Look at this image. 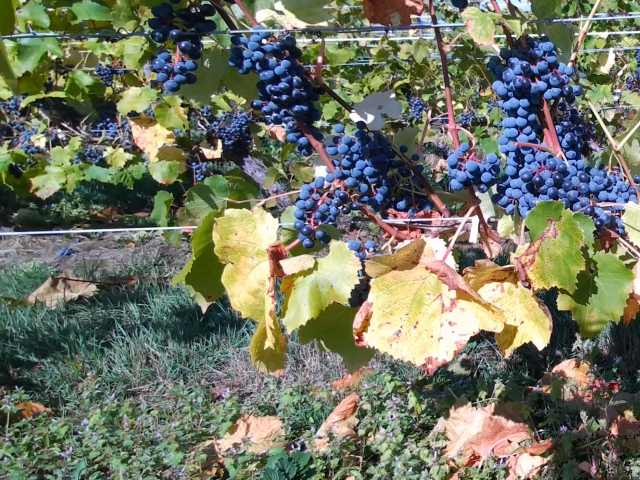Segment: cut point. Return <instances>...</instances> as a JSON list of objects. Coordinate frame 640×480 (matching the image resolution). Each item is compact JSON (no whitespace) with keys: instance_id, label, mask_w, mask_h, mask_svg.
<instances>
[{"instance_id":"obj_1","label":"cut point","mask_w":640,"mask_h":480,"mask_svg":"<svg viewBox=\"0 0 640 480\" xmlns=\"http://www.w3.org/2000/svg\"><path fill=\"white\" fill-rule=\"evenodd\" d=\"M612 156H613V157H614V159L617 161V163H618V165H619V168H620V170H621V173H624V168H623V166H622V164H621L620 160L615 156V154H614V151H613V150H611V152H610V154H609V161H608V165H607V166L609 167V169H610V167H611V163H612Z\"/></svg>"},{"instance_id":"obj_2","label":"cut point","mask_w":640,"mask_h":480,"mask_svg":"<svg viewBox=\"0 0 640 480\" xmlns=\"http://www.w3.org/2000/svg\"><path fill=\"white\" fill-rule=\"evenodd\" d=\"M394 241V238L391 237L388 241H386L382 247L381 250H385L386 246H388V251H391V247H392V242Z\"/></svg>"},{"instance_id":"obj_3","label":"cut point","mask_w":640,"mask_h":480,"mask_svg":"<svg viewBox=\"0 0 640 480\" xmlns=\"http://www.w3.org/2000/svg\"><path fill=\"white\" fill-rule=\"evenodd\" d=\"M459 130L462 131L463 133L467 134L471 138L472 141H475V137L470 131L466 130L465 128H463L461 126H459Z\"/></svg>"}]
</instances>
